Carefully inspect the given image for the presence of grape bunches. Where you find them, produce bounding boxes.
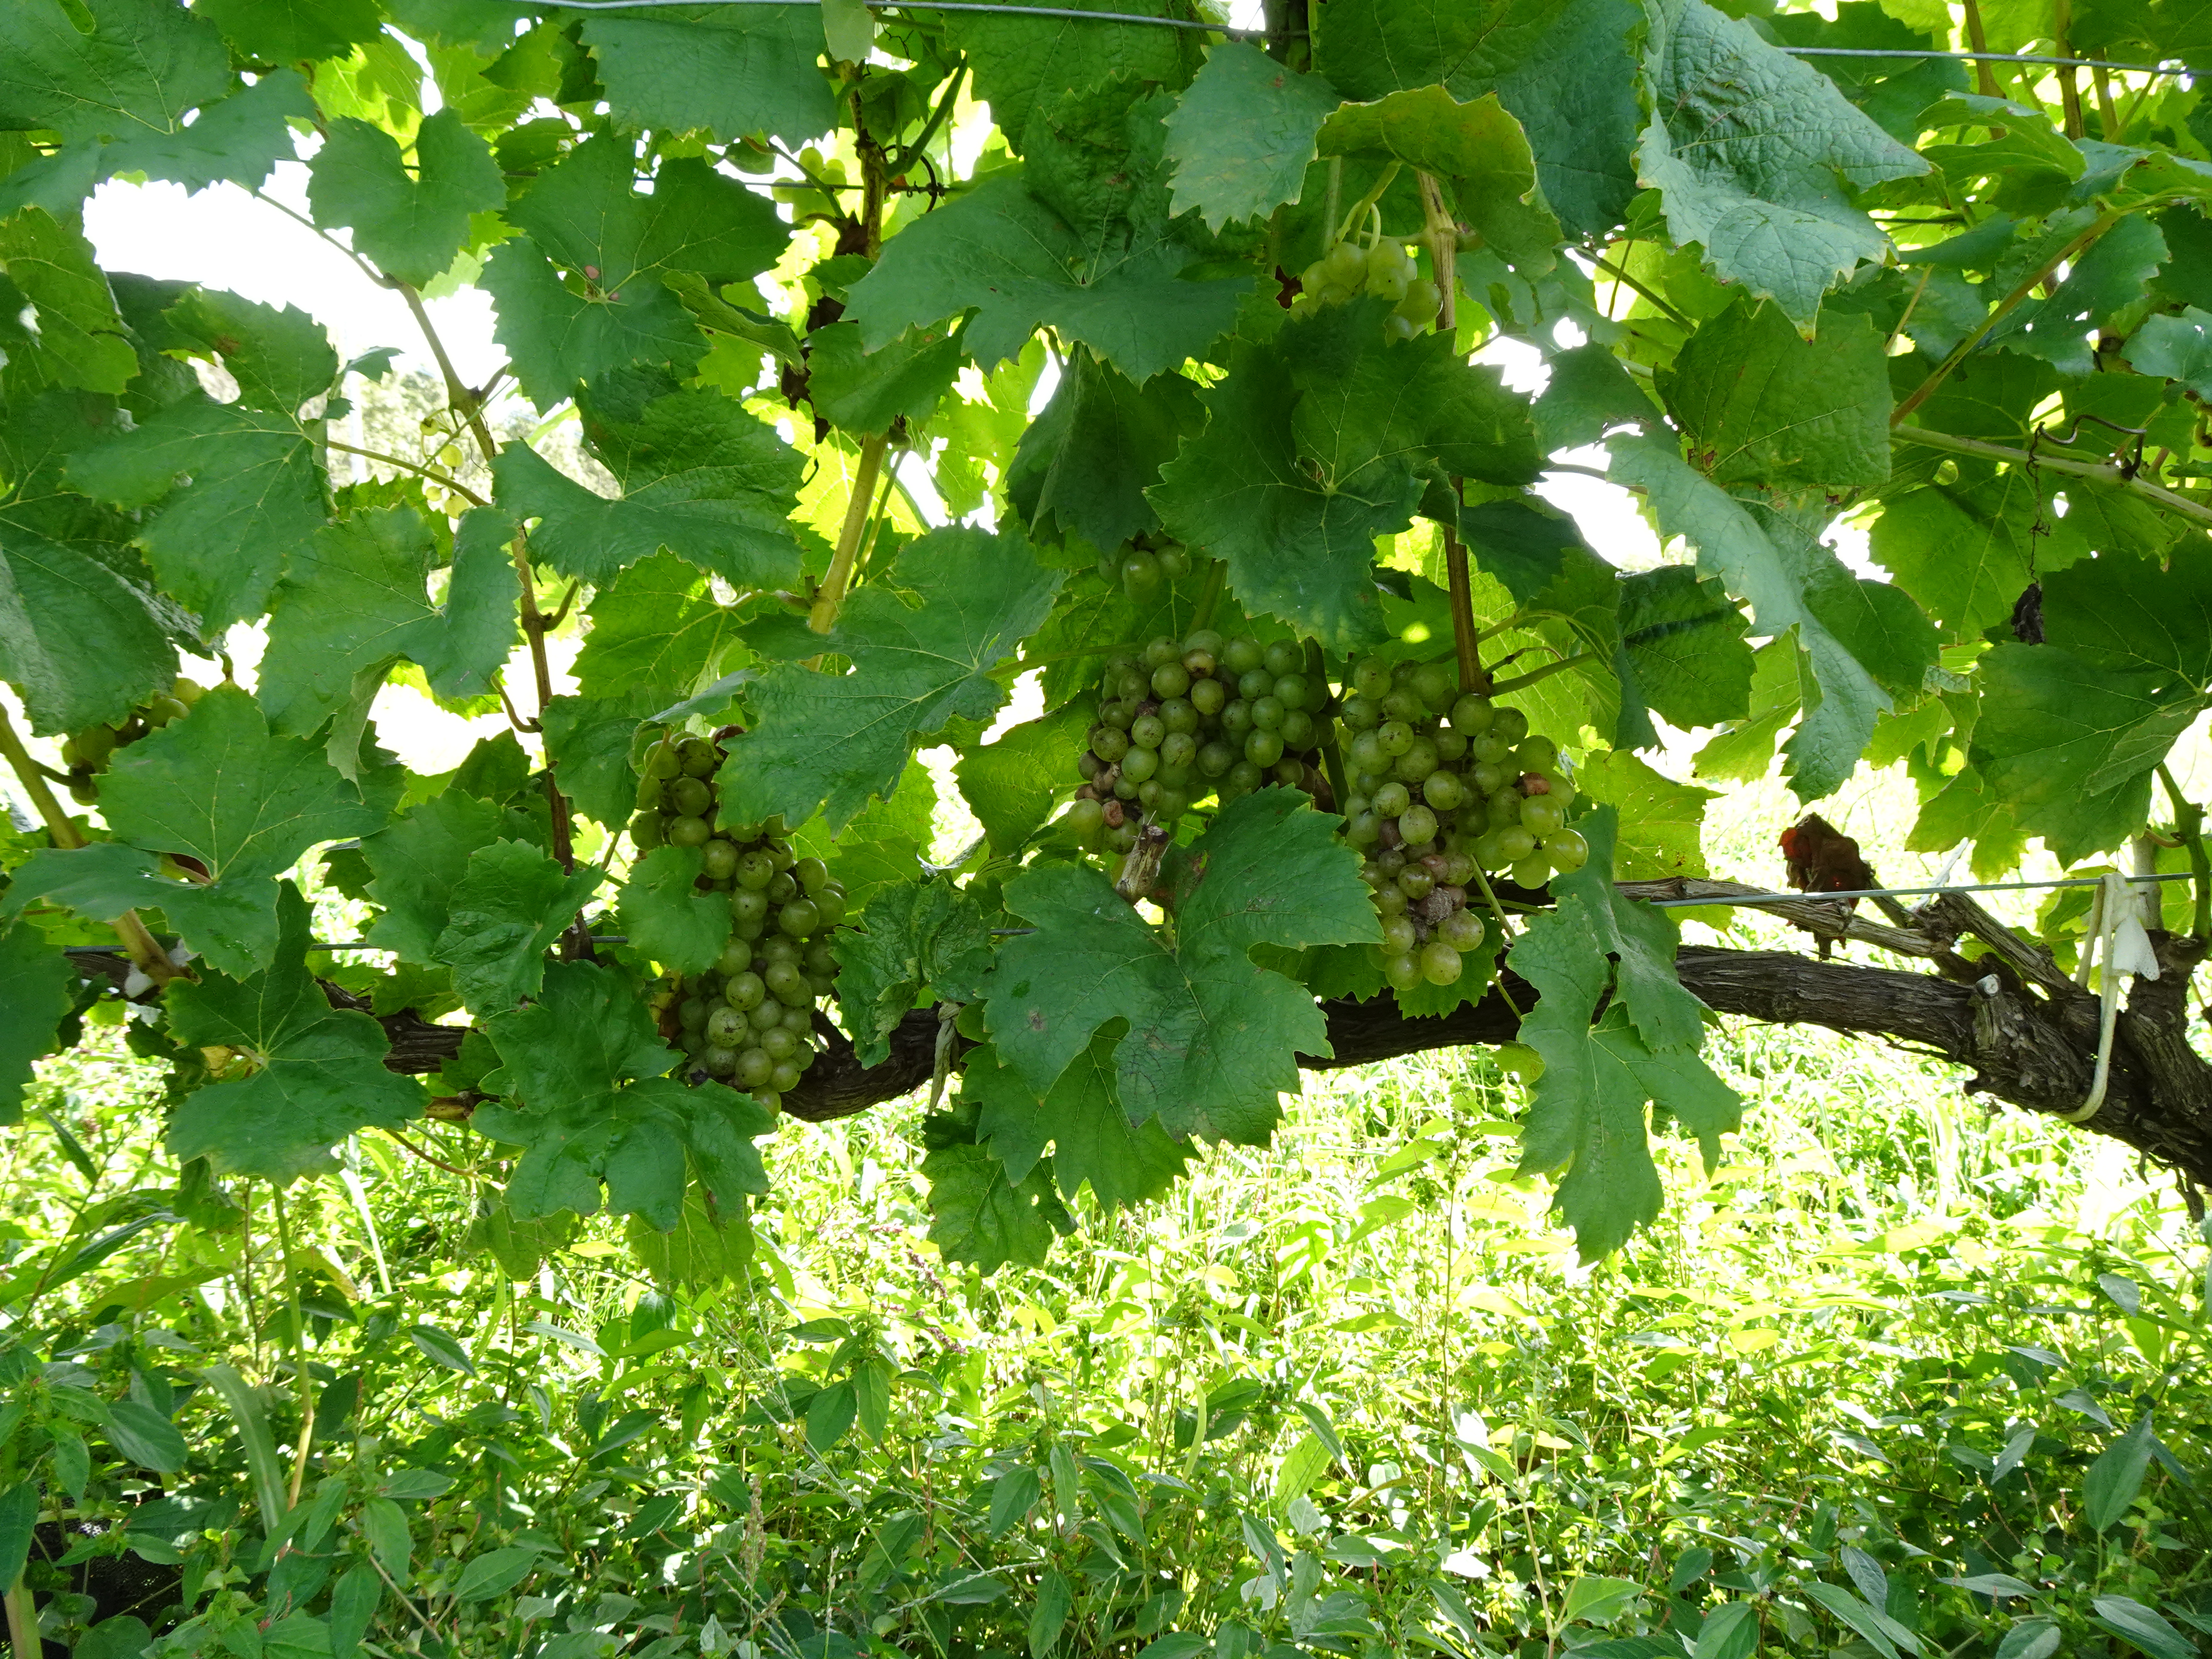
[630,731,796,928]
[1194,636,1336,794]
[1096,530,1191,607]
[679,857,852,1117]
[1454,707,1589,889]
[1289,238,1443,347]
[1065,629,1225,854]
[1335,655,1508,990]
[63,677,210,805]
